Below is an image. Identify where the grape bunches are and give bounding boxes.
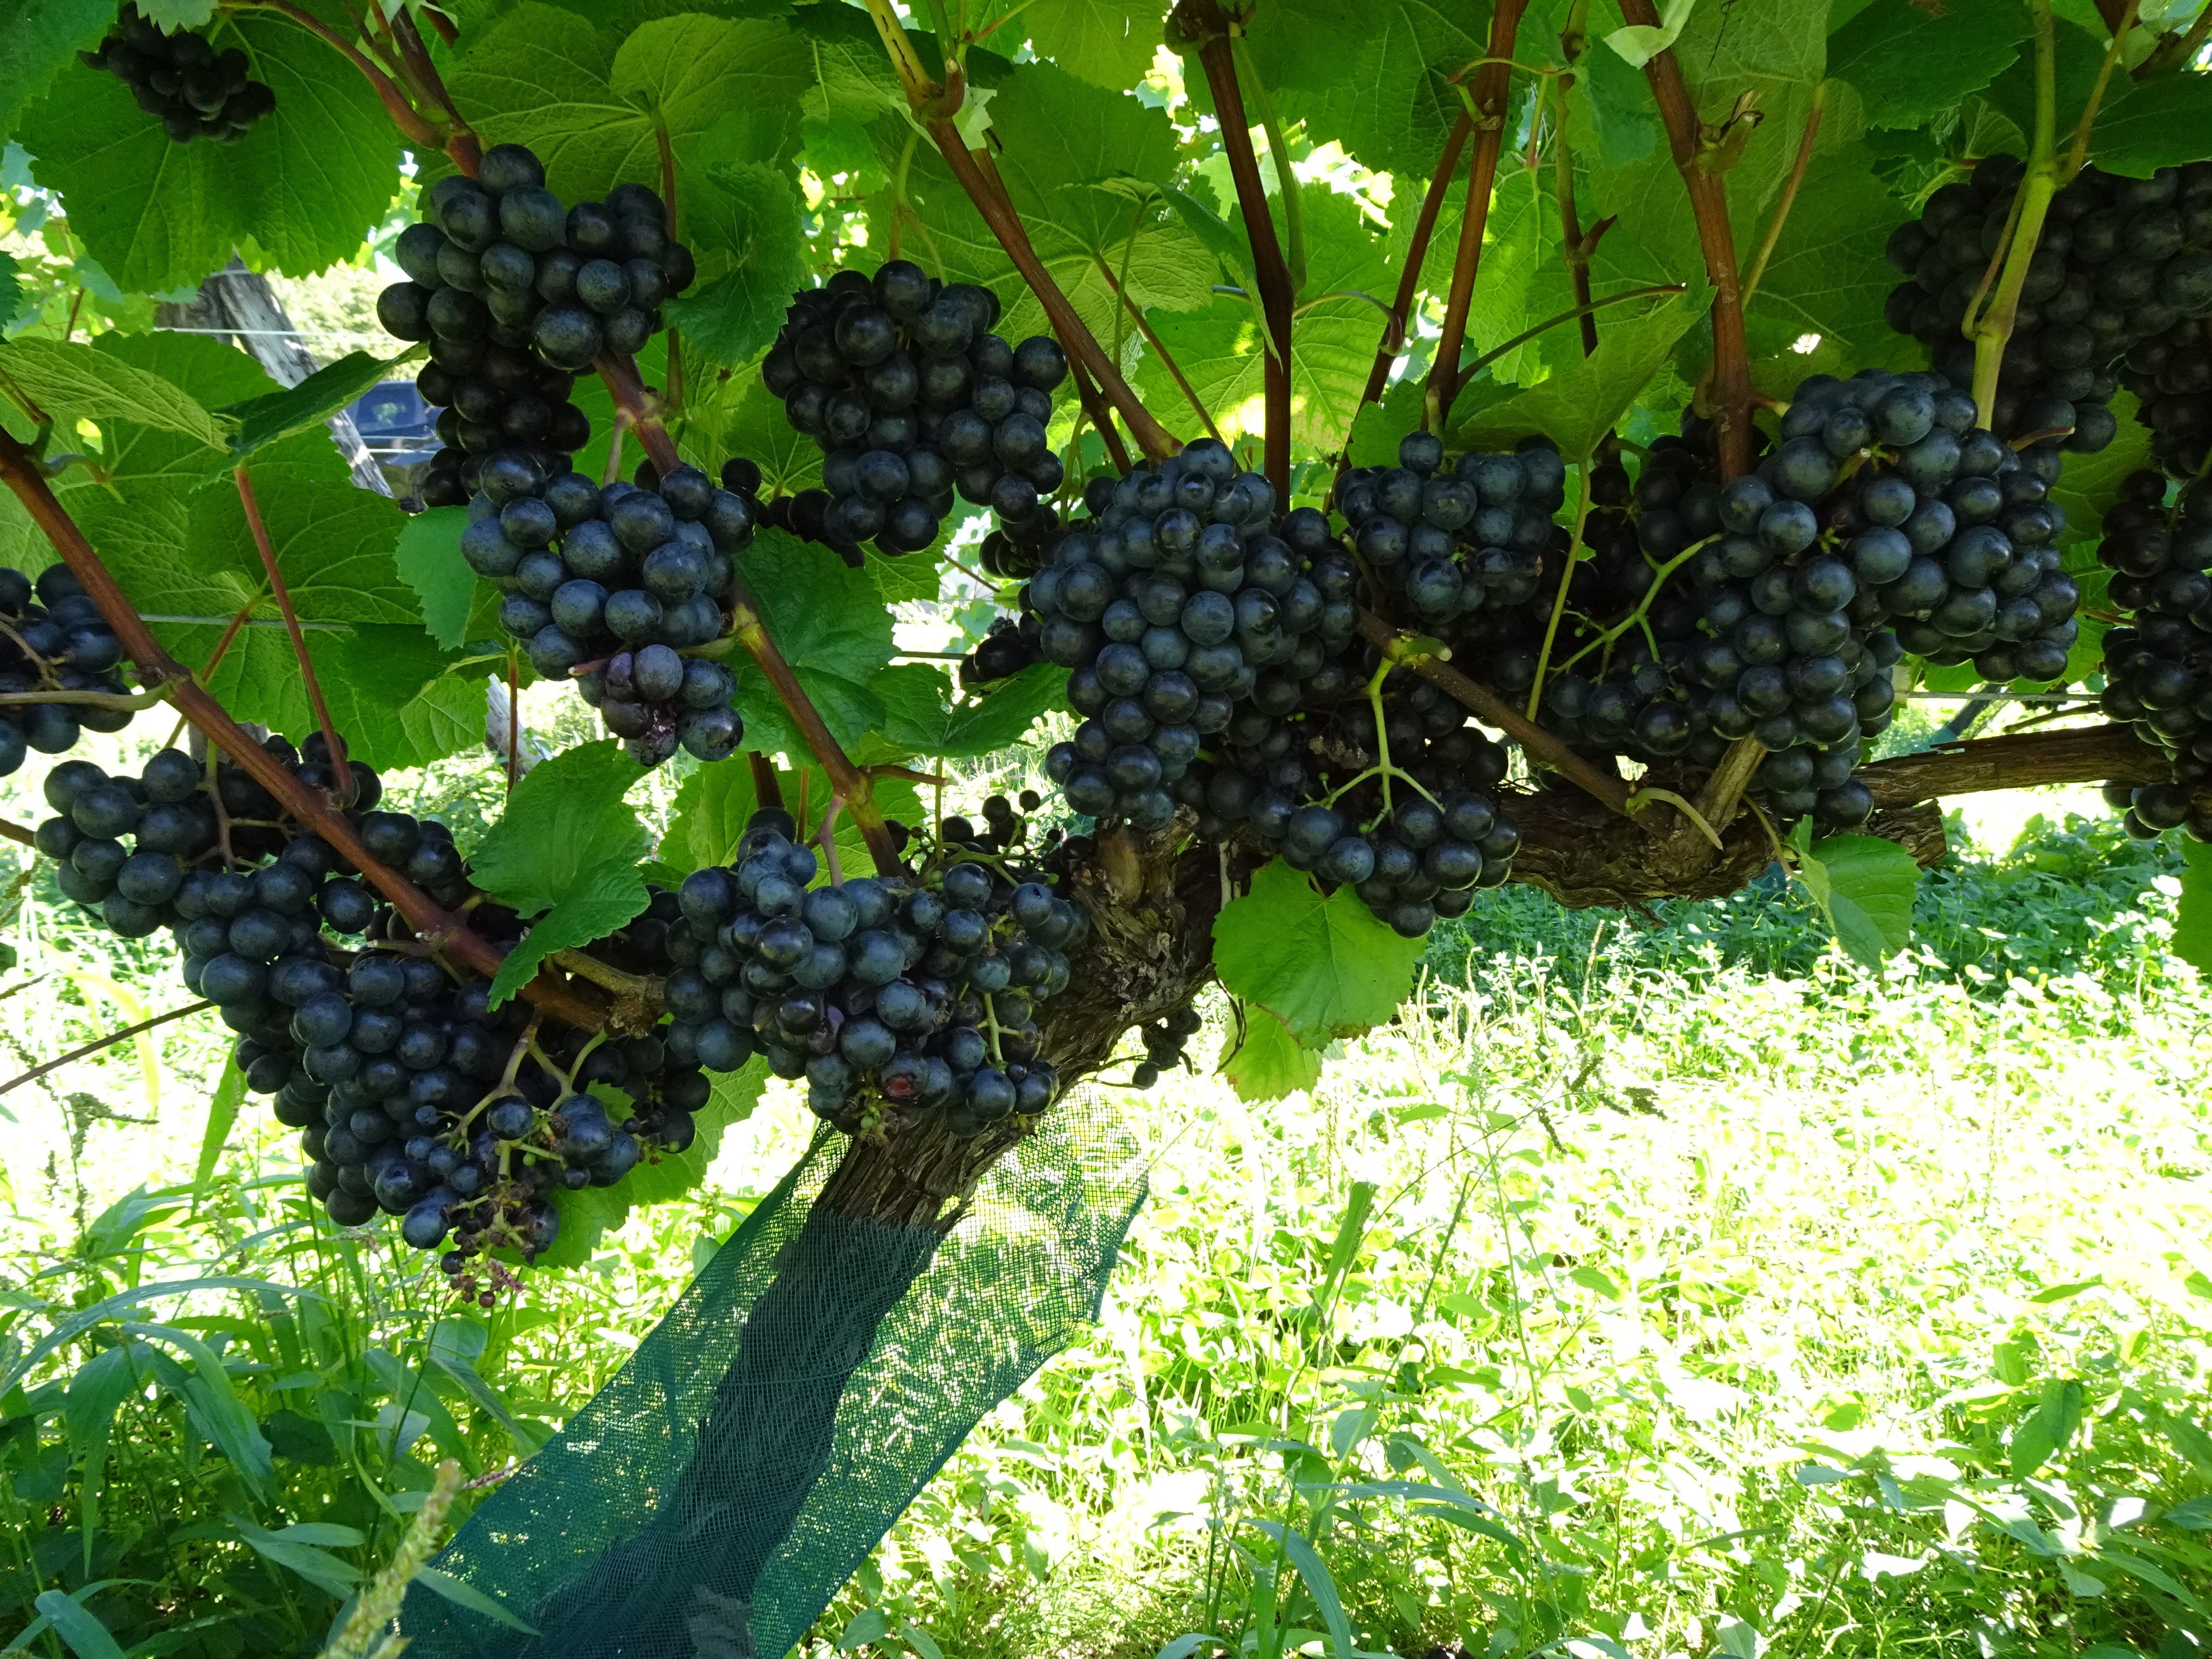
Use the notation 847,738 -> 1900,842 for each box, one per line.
375,1090 -> 636,1305
1332,431 -> 1565,619
1756,368 -> 2078,682
959,475 -> 1116,698
1499,600 -> 1709,757
376,144 -> 694,508
1565,400 -> 1776,645
1132,1002 -> 1202,1090
942,337 -> 1067,520
632,456 -> 868,568
1027,438 -> 1357,833
886,789 -> 1093,884
33,731 -> 381,1226
2114,318 -> 2212,478
263,812 -> 509,1196
1332,580 -> 1523,799
1691,475 -> 1900,830
1161,700 -> 1311,840
148,667 -> 167,671
459,450 -> 759,768
1248,758 -> 1521,938
2092,471 -> 2212,847
729,876 -> 956,1133
763,258 -> 1003,557
900,860 -> 1087,1137
2060,148 -> 2212,339
565,884 -> 716,1151
1883,151 -> 2139,454
0,560 -> 167,777
77,0 -> 277,146
470,891 -> 620,1107
665,806 -> 817,1071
